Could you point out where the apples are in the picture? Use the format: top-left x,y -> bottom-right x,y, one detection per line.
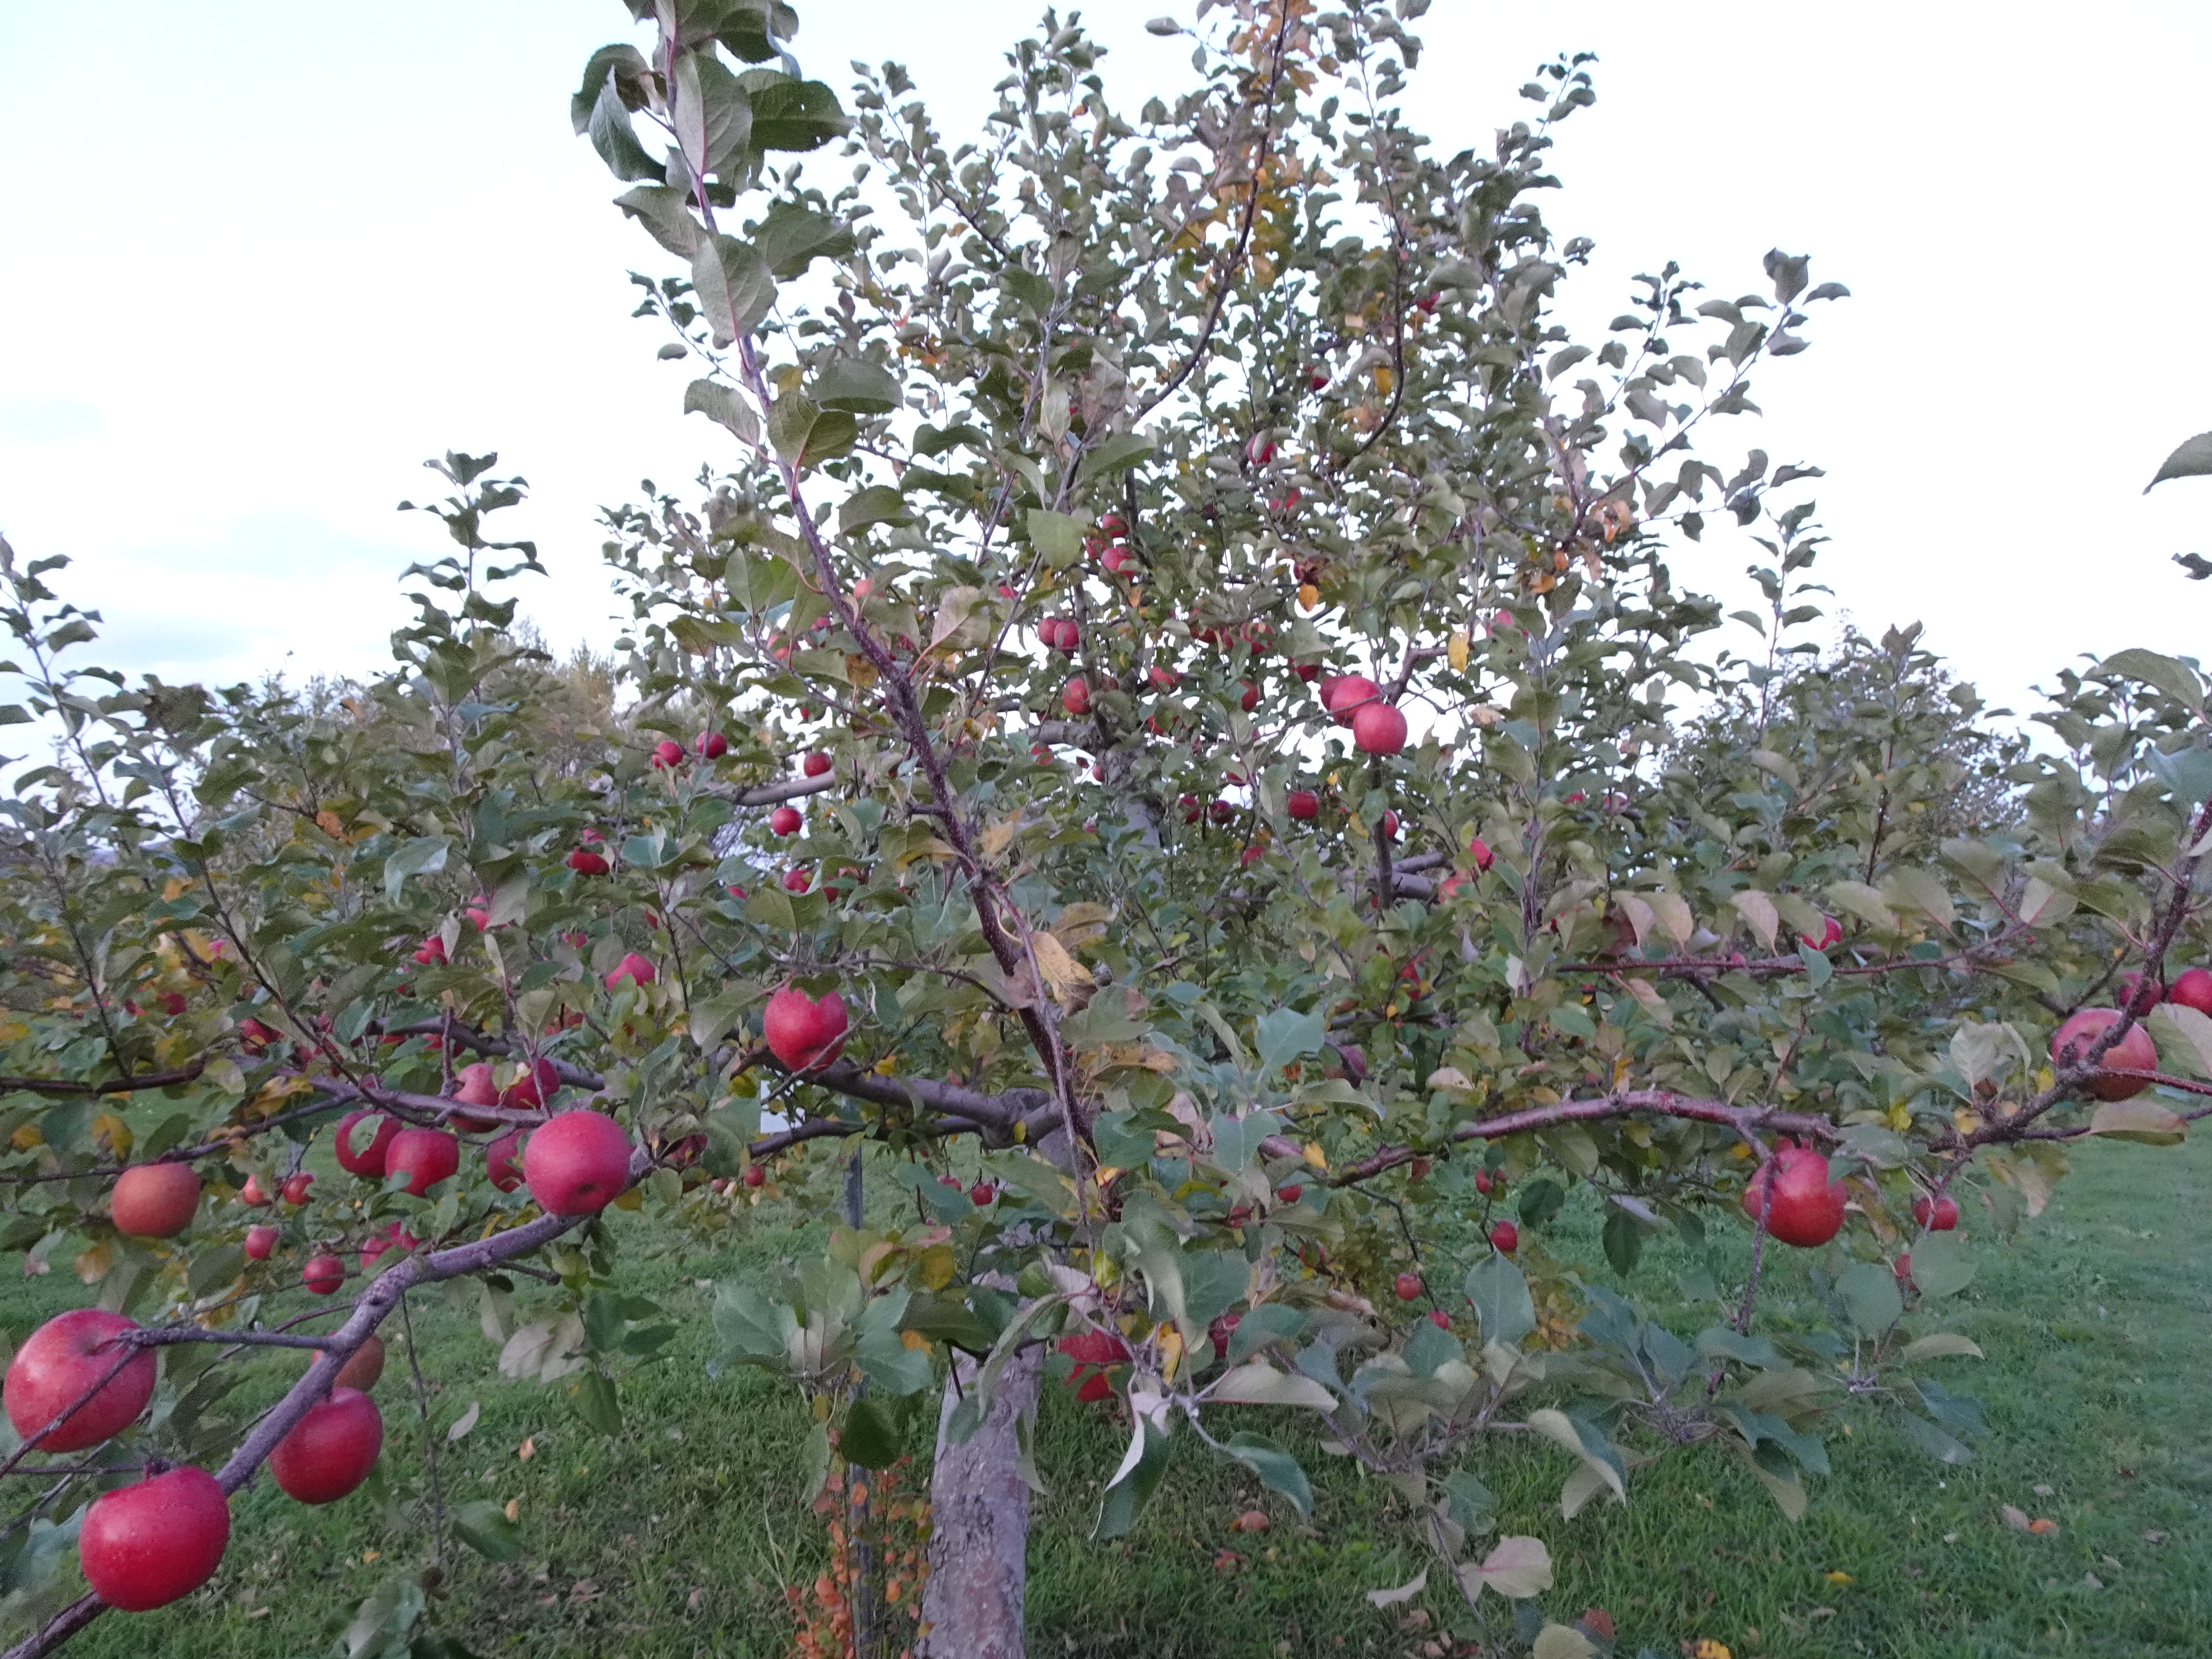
1173,734 -> 1201,755
782,869 -> 838,902
125,983 -> 186,1016
1242,624 -> 1273,655
1339,807 -> 1345,813
1429,1310 -> 1449,1330
645,909 -> 658,930
1476,1167 -> 1506,1194
936,1175 -> 962,1192
1030,745 -> 1054,765
1038,618 -> 1060,644
312,1331 -> 384,1392
523,1111 -> 634,1216
1084,826 -> 1095,834
1054,621 -> 1079,650
1148,666 -> 1178,693
319,1006 -> 372,1046
79,1466 -> 231,1612
1227,1206 -> 1252,1228
853,579 -> 873,600
395,966 -> 416,998
360,1220 -> 429,1269
110,1162 -> 201,1239
1101,514 -> 1129,538
727,887 -> 747,900
569,829 -> 614,875
1324,1045 -> 1366,1089
606,952 -> 655,992
1395,1273 -> 1422,1300
422,1033 -> 465,1058
380,1035 -> 407,1044
1086,537 -> 1107,559
1353,704 -> 1407,754
1914,1196 -> 1958,1230
1252,728 -> 1260,741
1725,952 -> 1746,973
1242,846 -> 1267,868
544,1005 -> 584,1036
3,1309 -> 157,1453
1371,894 -> 1378,909
1799,915 -> 1842,950
771,807 -> 802,836
2119,972 -> 2161,1016
652,741 -> 683,770
414,935 -> 448,965
1238,679 -> 1259,712
1469,838 -> 1494,870
206,939 -> 224,957
385,1127 -> 459,1198
896,877 -> 907,894
464,895 -> 509,931
1278,1185 -> 1302,1203
1417,291 -> 1440,315
1179,797 -> 1200,823
998,586 -> 1019,600
1269,488 -> 1301,511
1246,433 -> 1277,462
360,1075 -> 383,1089
268,1387 -> 384,1505
696,731 -> 727,759
889,633 -> 911,660
1288,657 -> 1319,683
666,1134 -> 708,1192
1209,800 -> 1233,824
297,1042 -> 342,1078
1101,546 -> 1135,582
1056,1327 -> 1130,1401
1148,715 -> 1185,736
282,1173 -> 315,1205
303,1255 -> 344,1295
448,1062 -> 514,1134
1304,365 -> 1330,391
242,1173 -> 264,1207
1561,792 -> 1584,804
1062,678 -> 1092,715
1069,405 -> 1078,416
1383,809 -> 1398,839
1208,1313 -> 1242,1358
1551,911 -> 1567,927
1299,1241 -> 1325,1267
800,701 -> 826,721
237,1018 -> 282,1056
1893,1253 -> 1918,1290
804,752 -> 831,777
1744,1151 -> 1848,1247
2052,1008 -> 2156,1102
1438,877 -> 1472,902
744,1165 -> 765,1186
1604,797 -> 1610,805
1490,1221 -> 1518,1251
566,932 -> 588,949
245,1226 -> 279,1260
2168,968 -> 2212,1019
767,633 -> 800,661
1092,763 -> 1105,782
1188,609 -> 1222,644
804,616 -> 834,649
1222,624 -> 1246,648
507,1058 -> 560,1110
1398,949 -> 1434,999
1321,676 -> 1346,710
1774,1136 -> 1811,1152
486,1128 -> 531,1193
971,1181 -> 995,1206
1226,761 -> 1254,786
764,986 -> 848,1073
335,1109 -> 403,1178
1330,676 -> 1382,730
1486,610 -> 1527,638
1288,790 -> 1319,819
1293,556 -> 1330,585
